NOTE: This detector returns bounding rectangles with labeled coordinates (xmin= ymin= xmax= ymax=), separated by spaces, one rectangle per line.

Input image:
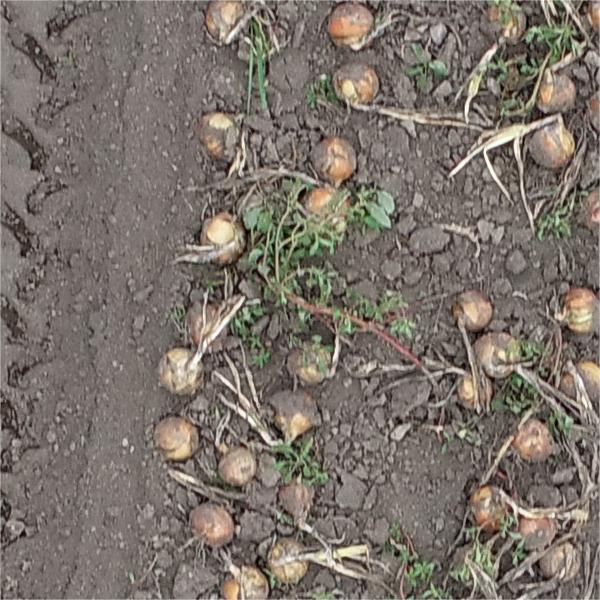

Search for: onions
xmin=218 ymin=448 xmax=255 ymax=487
xmin=562 ymin=287 xmax=595 ymax=333
xmin=578 ymin=184 xmax=600 ymax=236
xmin=586 ymin=0 xmax=600 ymax=29
xmin=203 ymin=214 xmax=241 ymax=261
xmin=204 ymin=2 xmax=245 ymax=42
xmin=559 ymin=362 xmax=592 ymax=403
xmin=301 ymin=182 xmax=337 ymax=215
xmin=325 ymin=3 xmax=371 ymax=45
xmin=153 ymin=416 xmax=196 ymax=460
xmin=456 ymin=373 xmax=493 ymax=409
xmin=268 ymin=534 xmax=309 ymax=584
xmin=159 ymin=347 xmax=203 ymax=395
xmin=293 ymin=341 xmax=331 ymax=382
xmin=528 ymin=120 xmax=573 ymax=167
xmin=332 ymin=64 xmax=377 ymax=102
xmin=311 ymin=136 xmax=354 ymax=181
xmin=515 ymin=518 xmax=551 ymax=549
xmin=282 ymin=476 xmax=313 ymax=516
xmin=196 ymin=111 xmax=236 ymax=162
xmin=269 ymin=389 xmax=316 ymax=438
xmin=495 ymin=7 xmax=524 ymax=40
xmin=189 ymin=503 xmax=233 ymax=545
xmin=479 ymin=331 xmax=524 ymax=374
xmin=512 ymin=420 xmax=549 ymax=460
xmin=537 ymin=543 xmax=571 ymax=577
xmin=451 ymin=290 xmax=492 ymax=329
xmin=221 ymin=564 xmax=269 ymax=599
xmin=467 ymin=485 xmax=508 ymax=528
xmin=587 ymin=86 xmax=600 ymax=130
xmin=184 ymin=304 xmax=230 ymax=352
xmin=536 ymin=72 xmax=577 ymax=110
